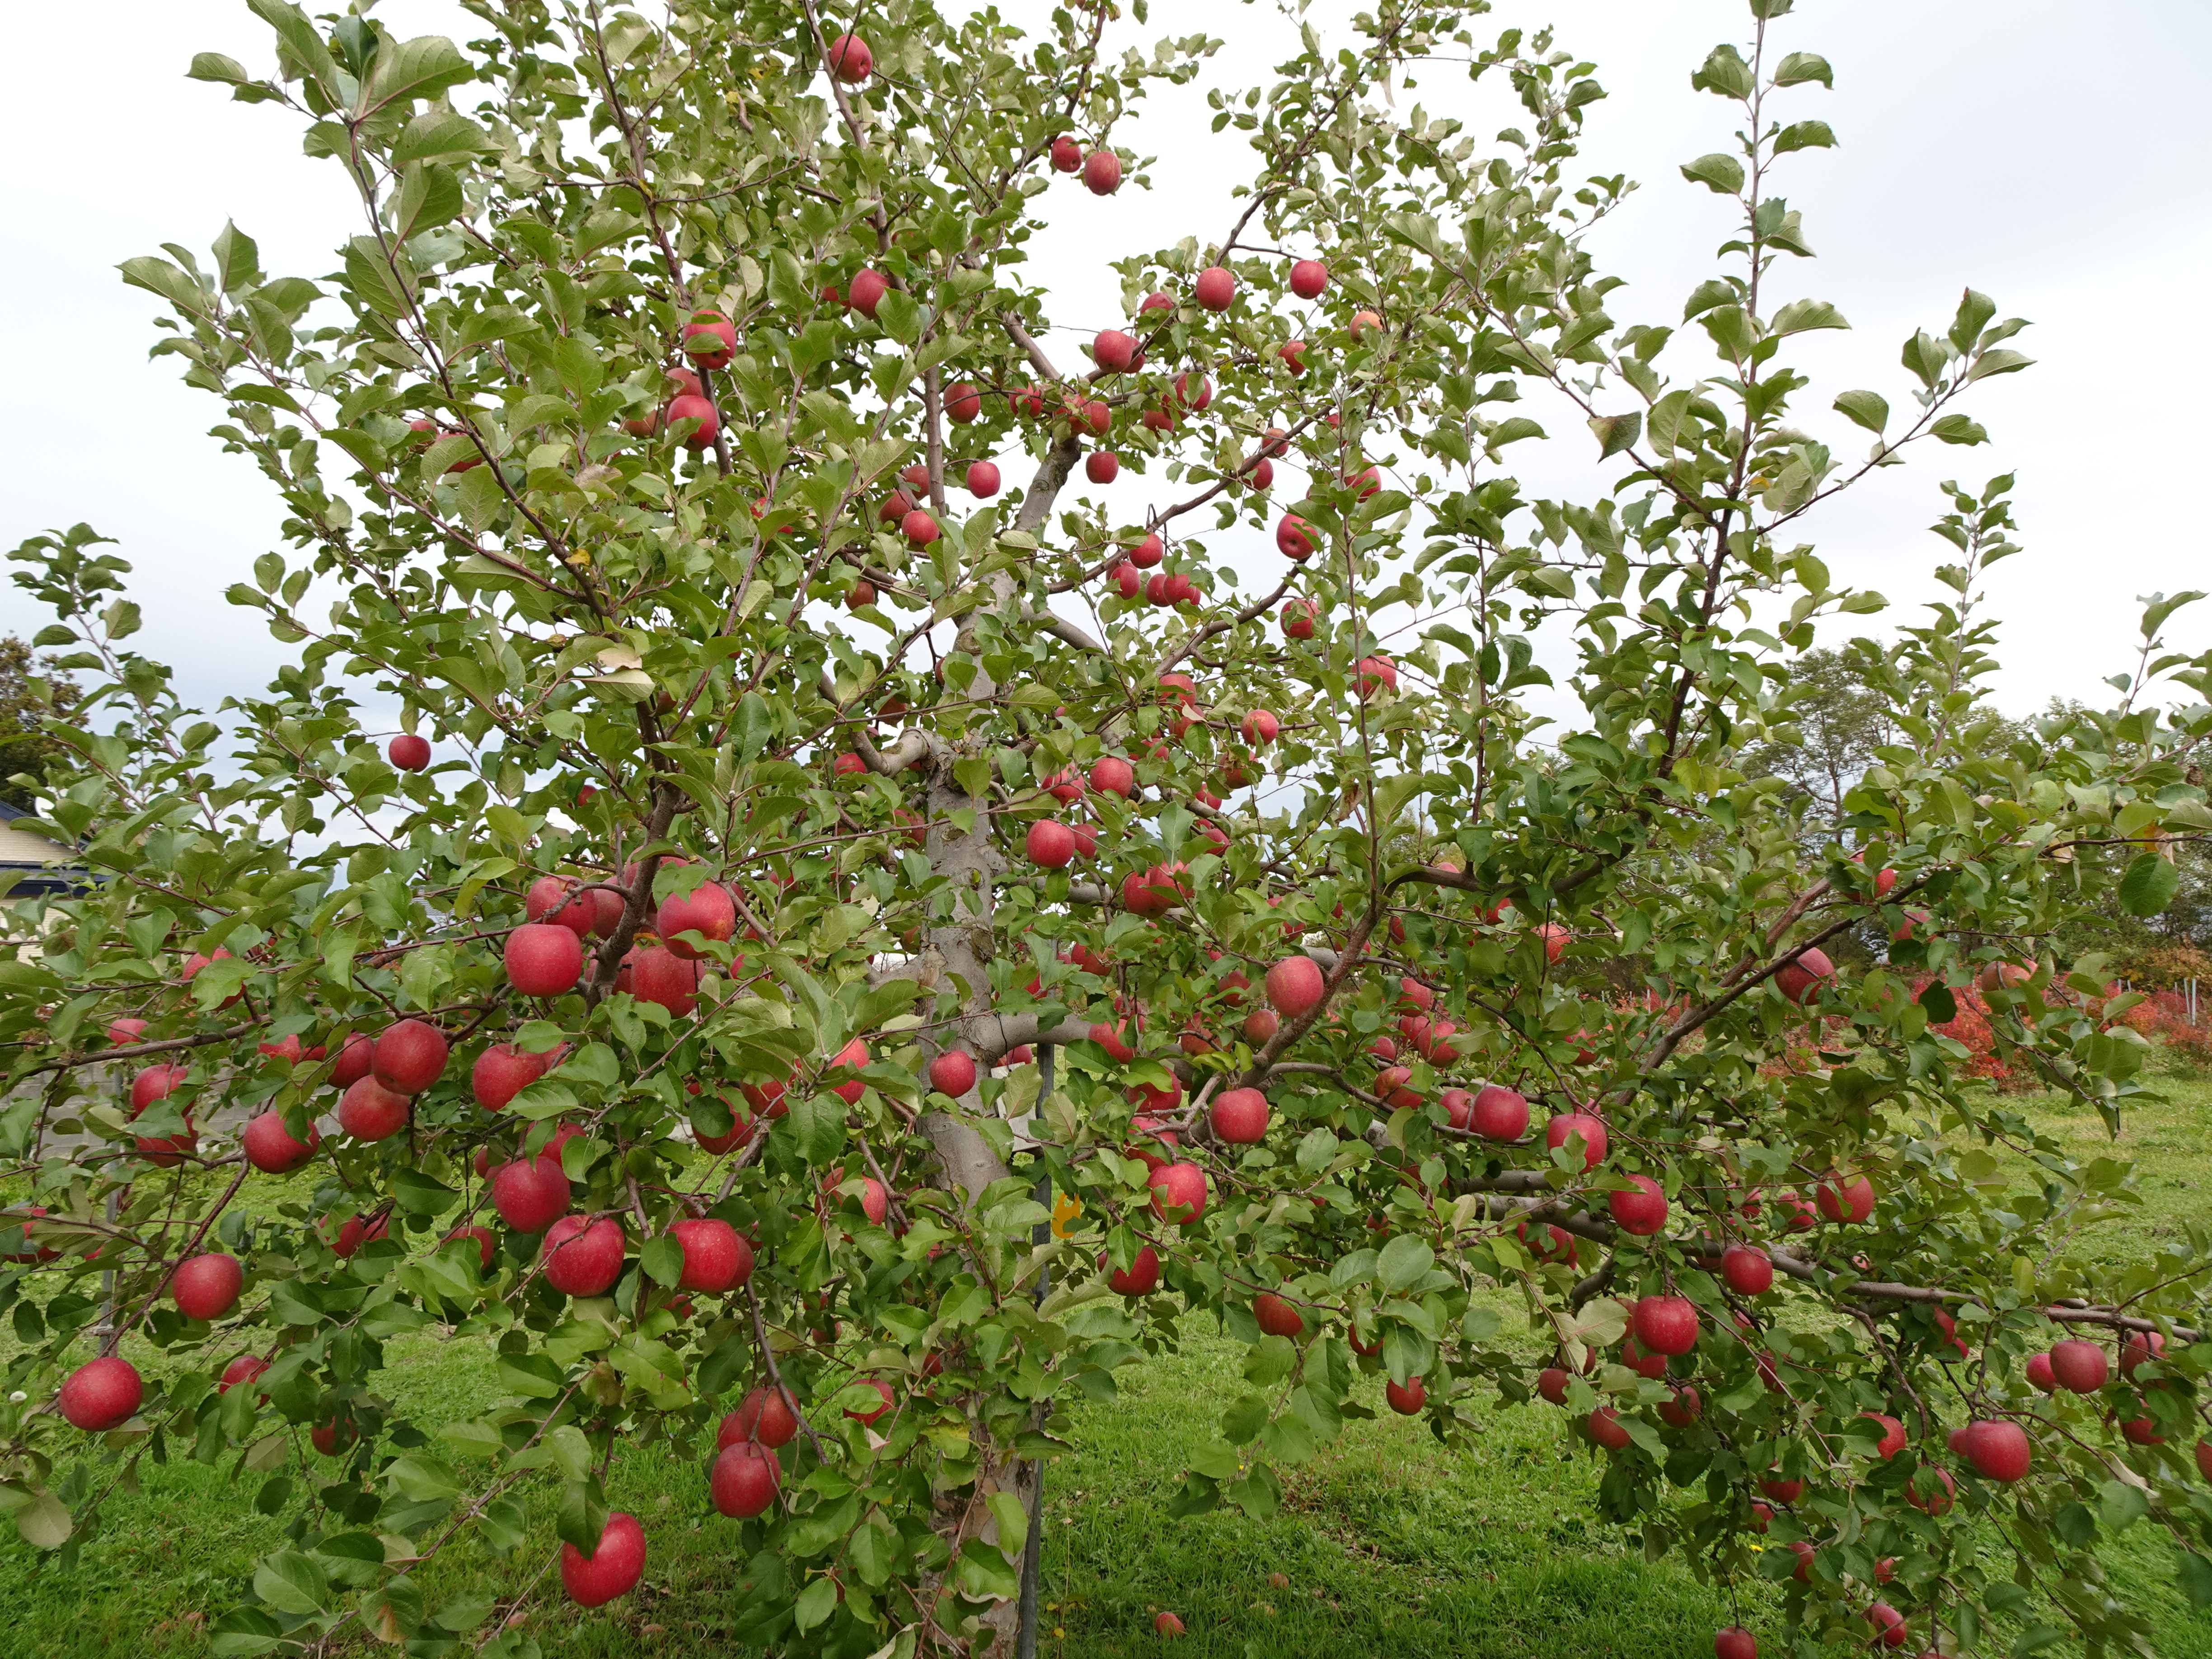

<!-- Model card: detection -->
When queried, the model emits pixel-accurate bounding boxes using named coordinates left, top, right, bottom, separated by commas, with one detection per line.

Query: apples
left=1350, top=310, right=1386, bottom=346
left=893, top=1179, right=951, bottom=1249
left=371, top=1018, right=449, bottom=1098
left=559, top=1511, right=646, bottom=1608
left=1130, top=921, right=1163, bottom=955
left=1331, top=931, right=1373, bottom=965
left=996, top=1038, right=1033, bottom=1078
left=1783, top=1540, right=1821, bottom=1585
left=1754, top=1348, right=1805, bottom=1394
left=644, top=676, right=678, bottom=714
left=898, top=915, right=937, bottom=956
left=1473, top=1084, right=1532, bottom=1146
left=389, top=734, right=431, bottom=774
left=868, top=686, right=909, bottom=726
left=1216, top=746, right=1262, bottom=789
left=1124, top=1063, right=1183, bottom=1123
left=1553, top=1095, right=1612, bottom=1127
left=710, top=879, right=744, bottom=916
left=1587, top=1403, right=1640, bottom=1451
left=1170, top=571, right=1201, bottom=613
left=891, top=231, right=930, bottom=264
left=1168, top=703, right=1205, bottom=747
left=792, top=800, right=815, bottom=823
left=766, top=870, right=798, bottom=898
left=1556, top=1020, right=1601, bottom=1068
left=471, top=1040, right=546, bottom=1116
left=739, top=1381, right=803, bottom=1453
left=736, top=1214, right=802, bottom=1265
left=105, top=1015, right=155, bottom=1058
left=1193, top=828, right=1234, bottom=863
left=665, top=1218, right=753, bottom=1292
left=309, top=1403, right=362, bottom=1458
left=1754, top=1454, right=1805, bottom=1504
left=1209, top=1084, right=1269, bottom=1144
left=1775, top=946, right=1838, bottom=1008
left=1722, top=1217, right=1765, bottom=1251
left=838, top=1379, right=897, bottom=1433
left=1126, top=739, right=1170, bottom=774
left=1259, top=427, right=1290, bottom=460
left=878, top=1446, right=904, bottom=1473
left=1160, top=382, right=1194, bottom=422
left=1244, top=1010, right=1280, bottom=1047
left=1736, top=1494, right=1774, bottom=1540
left=1281, top=600, right=1325, bottom=642
left=1692, top=1225, right=1743, bottom=1263
left=244, top=1106, right=318, bottom=1175
left=1932, top=1324, right=1975, bottom=1369
left=1111, top=335, right=1146, bottom=376
left=900, top=506, right=942, bottom=546
left=739, top=1067, right=795, bottom=1122
left=2039, top=1298, right=2067, bottom=1327
left=1122, top=864, right=1169, bottom=924
left=135, top=1107, right=204, bottom=1170
left=128, top=1061, right=195, bottom=1124
left=1013, top=915, right=1032, bottom=935
left=810, top=270, right=853, bottom=314
left=1554, top=1331, right=1597, bottom=1377
left=1721, top=1187, right=1766, bottom=1223
left=1909, top=1299, right=1961, bottom=1354
left=1398, top=1153, right=1448, bottom=1203
left=1721, top=1244, right=1774, bottom=1297
left=1434, top=859, right=1467, bottom=893
left=1044, top=951, right=1076, bottom=981
left=523, top=868, right=598, bottom=939
left=437, top=1225, right=493, bottom=1279
left=847, top=268, right=897, bottom=326
left=1868, top=1551, right=1898, bottom=1583
left=904, top=741, right=937, bottom=776
left=750, top=495, right=796, bottom=541
left=830, top=748, right=868, bottom=789
left=356, top=1196, right=404, bottom=1248
left=1304, top=1187, right=1329, bottom=1213
left=57, top=1355, right=143, bottom=1432
left=1851, top=1414, right=1909, bottom=1465
left=1086, top=1011, right=1142, bottom=1071
left=900, top=1240, right=945, bottom=1290
left=246, top=936, right=280, bottom=963
left=828, top=33, right=874, bottom=86
left=1538, top=1248, right=1578, bottom=1281
left=525, top=1117, right=594, bottom=1174
left=1421, top=1020, right=1459, bottom=1066
left=1083, top=149, right=1123, bottom=197
left=658, top=1366, right=690, bottom=1395
left=1253, top=1280, right=1312, bottom=1337
left=216, top=1352, right=275, bottom=1413
left=1981, top=955, right=2043, bottom=1010
left=821, top=854, right=848, bottom=883
left=1092, top=328, right=1131, bottom=375
left=1219, top=1174, right=1251, bottom=1202
left=256, top=1020, right=327, bottom=1076
left=1055, top=704, right=1072, bottom=723
left=1139, top=290, right=1180, bottom=330
left=470, top=1144, right=521, bottom=1181
left=1267, top=1269, right=1291, bottom=1293
left=1537, top=1365, right=1579, bottom=1408
left=1350, top=653, right=1395, bottom=700
left=585, top=872, right=662, bottom=944
left=1305, top=475, right=1338, bottom=513
left=832, top=820, right=860, bottom=846
left=1659, top=1383, right=1702, bottom=1431
left=1315, top=411, right=1359, bottom=450
left=1388, top=906, right=1435, bottom=948
left=1774, top=1193, right=1821, bottom=1235
left=1198, top=941, right=1223, bottom=968
left=2120, top=1329, right=2177, bottom=1391
left=862, top=219, right=882, bottom=236
left=1089, top=757, right=1133, bottom=806
left=1528, top=923, right=1575, bottom=969
left=1608, top=1173, right=1671, bottom=1237
left=1472, top=888, right=1516, bottom=930
left=718, top=636, right=743, bottom=664
left=1949, top=1424, right=1998, bottom=1478
left=1032, top=380, right=1058, bottom=406
left=1267, top=955, right=1325, bottom=1020
left=323, top=1032, right=375, bottom=1091
left=943, top=379, right=985, bottom=424
left=1289, top=257, right=1330, bottom=300
left=1183, top=780, right=1222, bottom=817
left=1373, top=1065, right=1426, bottom=1114
left=3, top=1205, right=63, bottom=1265
left=1894, top=1459, right=1952, bottom=1517
left=711, top=719, right=735, bottom=745
left=1008, top=376, right=1046, bottom=420
left=789, top=949, right=818, bottom=978
left=1602, top=1294, right=1638, bottom=1343
left=1840, top=1254, right=1869, bottom=1283
left=966, top=460, right=1002, bottom=501
left=811, top=1317, right=842, bottom=1347
left=653, top=365, right=704, bottom=412
left=1461, top=933, right=1479, bottom=951
left=336, top=1076, right=414, bottom=1143
left=433, top=432, right=485, bottom=473
left=1396, top=1015, right=1433, bottom=1050
left=170, top=1252, right=242, bottom=1322
left=2121, top=1399, right=2175, bottom=1446
left=977, top=891, right=998, bottom=912
left=1893, top=906, right=1941, bottom=947
left=683, top=308, right=734, bottom=369
left=1096, top=1241, right=1160, bottom=1297
left=178, top=946, right=246, bottom=1017
left=828, top=878, right=860, bottom=910
left=902, top=463, right=932, bottom=502
left=1713, top=1621, right=1764, bottom=1659
left=82, top=1234, right=115, bottom=1265
left=1621, top=1334, right=1669, bottom=1381
left=762, top=827, right=775, bottom=840
left=1437, top=1086, right=1482, bottom=1139
left=876, top=804, right=923, bottom=848
left=1239, top=452, right=1274, bottom=492
left=741, top=919, right=777, bottom=953
left=842, top=581, right=878, bottom=615
left=438, top=1003, right=478, bottom=1039
left=1173, top=1252, right=1197, bottom=1280
left=1147, top=853, right=1204, bottom=911
left=1345, top=1310, right=1394, bottom=1357
left=993, top=962, right=1053, bottom=1016
left=1038, top=762, right=1084, bottom=805
left=1217, top=969, right=1255, bottom=1012
left=1818, top=1165, right=1875, bottom=1224
left=1859, top=1599, right=1908, bottom=1649
left=1241, top=708, right=1279, bottom=746
left=809, top=1167, right=891, bottom=1244
left=1717, top=1304, right=1756, bottom=1343
left=654, top=1292, right=693, bottom=1334
left=1386, top=1375, right=1426, bottom=1417
left=802, top=1288, right=830, bottom=1316
left=541, top=1212, right=626, bottom=1299
left=501, top=921, right=581, bottom=1000
left=510, top=1026, right=576, bottom=1078
left=1331, top=901, right=1369, bottom=935
left=798, top=1031, right=870, bottom=1108
left=1197, top=266, right=1236, bottom=313
left=613, top=935, right=711, bottom=1025
left=1155, top=673, right=1196, bottom=717
left=1127, top=531, right=1166, bottom=572
left=1271, top=338, right=1313, bottom=380
left=1363, top=1208, right=1405, bottom=1253
left=727, top=953, right=770, bottom=989
left=691, top=1089, right=757, bottom=1155
left=1261, top=896, right=1307, bottom=941
left=666, top=394, right=718, bottom=454
left=1965, top=1413, right=2036, bottom=1484
left=1085, top=448, right=1122, bottom=487
left=1077, top=399, right=1110, bottom=440
left=315, top=1209, right=365, bottom=1264
left=2026, top=1350, right=2068, bottom=1400
left=1107, top=560, right=1139, bottom=602
left=583, top=938, right=620, bottom=985
left=1177, top=1010, right=1235, bottom=1069
left=740, top=804, right=762, bottom=827
left=1142, top=397, right=1178, bottom=440
left=927, top=1380, right=957, bottom=1413
left=1193, top=817, right=1217, bottom=836
left=1547, top=1112, right=1607, bottom=1176
left=1070, top=820, right=1102, bottom=861
left=1023, top=820, right=1074, bottom=872
left=711, top=1438, right=781, bottom=1521
left=1341, top=456, right=1383, bottom=506
left=1147, top=570, right=1176, bottom=610
left=1277, top=506, right=1325, bottom=559
left=112, top=1186, right=142, bottom=1212
left=1124, top=1115, right=1182, bottom=1175
left=404, top=417, right=438, bottom=451
left=1007, top=926, right=1030, bottom=949
left=717, top=1406, right=769, bottom=1456
left=1514, top=1218, right=1568, bottom=1256
left=1629, top=1294, right=1700, bottom=1357
left=2048, top=1337, right=2109, bottom=1393
left=622, top=840, right=698, bottom=904
left=1071, top=932, right=1120, bottom=980
left=932, top=654, right=965, bottom=686
left=1049, top=132, right=1084, bottom=174
left=555, top=890, right=639, bottom=962
left=620, top=398, right=657, bottom=444
left=653, top=877, right=737, bottom=961
left=562, top=777, right=601, bottom=817
left=909, top=1348, right=951, bottom=1382
left=1390, top=970, right=1435, bottom=1020
left=1846, top=850, right=1896, bottom=906
left=1363, top=1033, right=1398, bottom=1070
left=1175, top=370, right=1211, bottom=411
left=682, top=1194, right=712, bottom=1221
left=927, top=1047, right=977, bottom=1099
left=2195, top=1424, right=2212, bottom=1492
left=1147, top=1159, right=1206, bottom=1226
left=850, top=939, right=875, bottom=974
left=490, top=1152, right=572, bottom=1235
left=1049, top=392, right=1080, bottom=428
left=1112, top=990, right=1139, bottom=1017
left=876, top=488, right=911, bottom=532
